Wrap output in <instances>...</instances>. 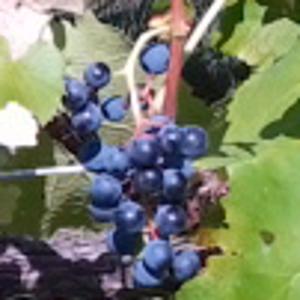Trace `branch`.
Wrapping results in <instances>:
<instances>
[{"label": "branch", "instance_id": "30e6481e", "mask_svg": "<svg viewBox=\"0 0 300 300\" xmlns=\"http://www.w3.org/2000/svg\"><path fill=\"white\" fill-rule=\"evenodd\" d=\"M186 15L187 6L185 2L183 0H172L170 24L171 38L169 42L170 63L166 76L163 106V113L169 118H175L179 114L177 96L180 75L183 68L182 47L185 38L184 18Z\"/></svg>", "mask_w": 300, "mask_h": 300}]
</instances>
